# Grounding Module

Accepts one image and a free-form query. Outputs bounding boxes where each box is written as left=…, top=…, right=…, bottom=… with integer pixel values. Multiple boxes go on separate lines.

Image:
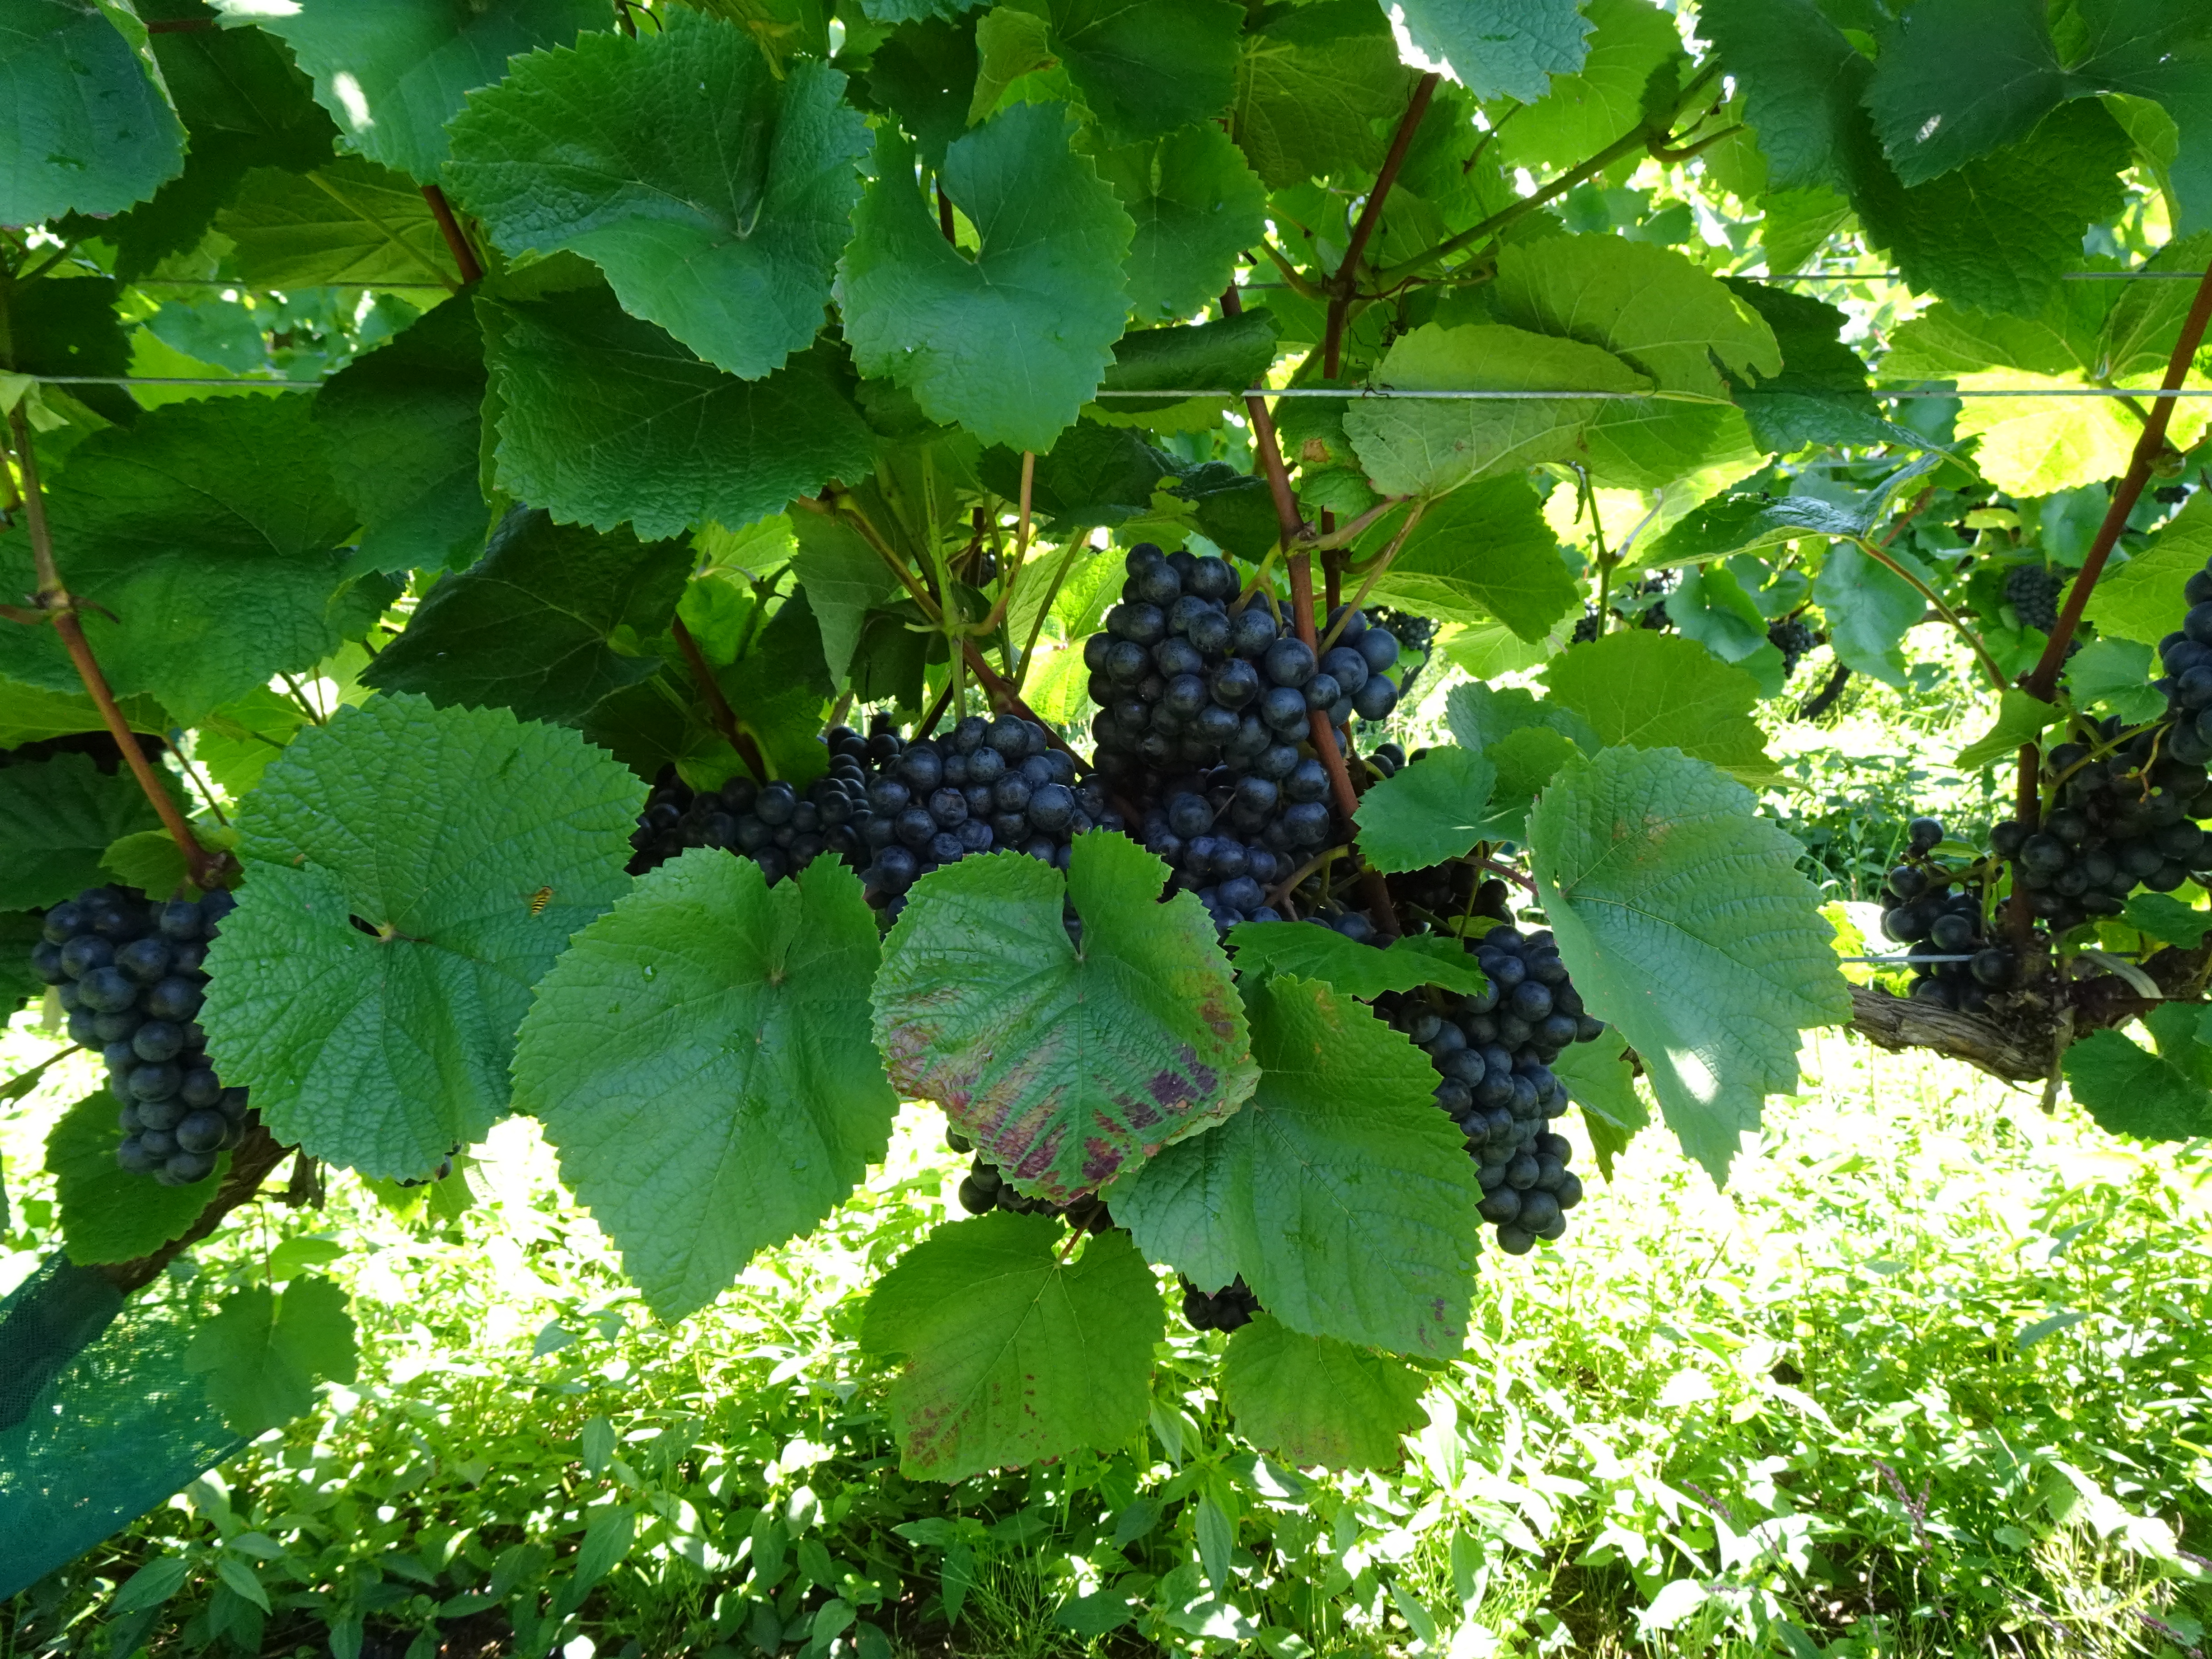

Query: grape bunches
left=1568, top=608, right=1603, bottom=648
left=826, top=712, right=906, bottom=772
left=1148, top=789, right=1286, bottom=964
left=1266, top=849, right=1376, bottom=949
left=1375, top=608, right=1439, bottom=655
left=1364, top=926, right=1605, bottom=1254
left=1154, top=607, right=1400, bottom=846
left=1765, top=615, right=1817, bottom=681
left=1880, top=817, right=2049, bottom=1017
left=859, top=714, right=1125, bottom=942
left=2005, top=563, right=2064, bottom=633
left=1064, top=1189, right=1133, bottom=1236
left=1178, top=1270, right=1264, bottom=1333
left=2152, top=557, right=2211, bottom=767
left=34, top=884, right=261, bottom=1187
left=1990, top=712, right=2212, bottom=933
left=1082, top=543, right=1292, bottom=811
left=946, top=1122, right=1063, bottom=1218
left=628, top=755, right=872, bottom=887
left=1330, top=744, right=1515, bottom=938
